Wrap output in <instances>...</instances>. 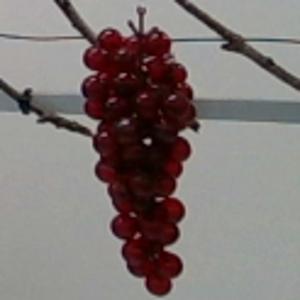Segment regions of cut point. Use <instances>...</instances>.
<instances>
[{"label":"cut point","instance_id":"cut-point-1","mask_svg":"<svg viewBox=\"0 0 300 300\" xmlns=\"http://www.w3.org/2000/svg\"><path fill=\"white\" fill-rule=\"evenodd\" d=\"M135 15L138 16V32L137 35L144 38L146 36L145 21L149 14L147 0H136L134 7Z\"/></svg>","mask_w":300,"mask_h":300}]
</instances>
